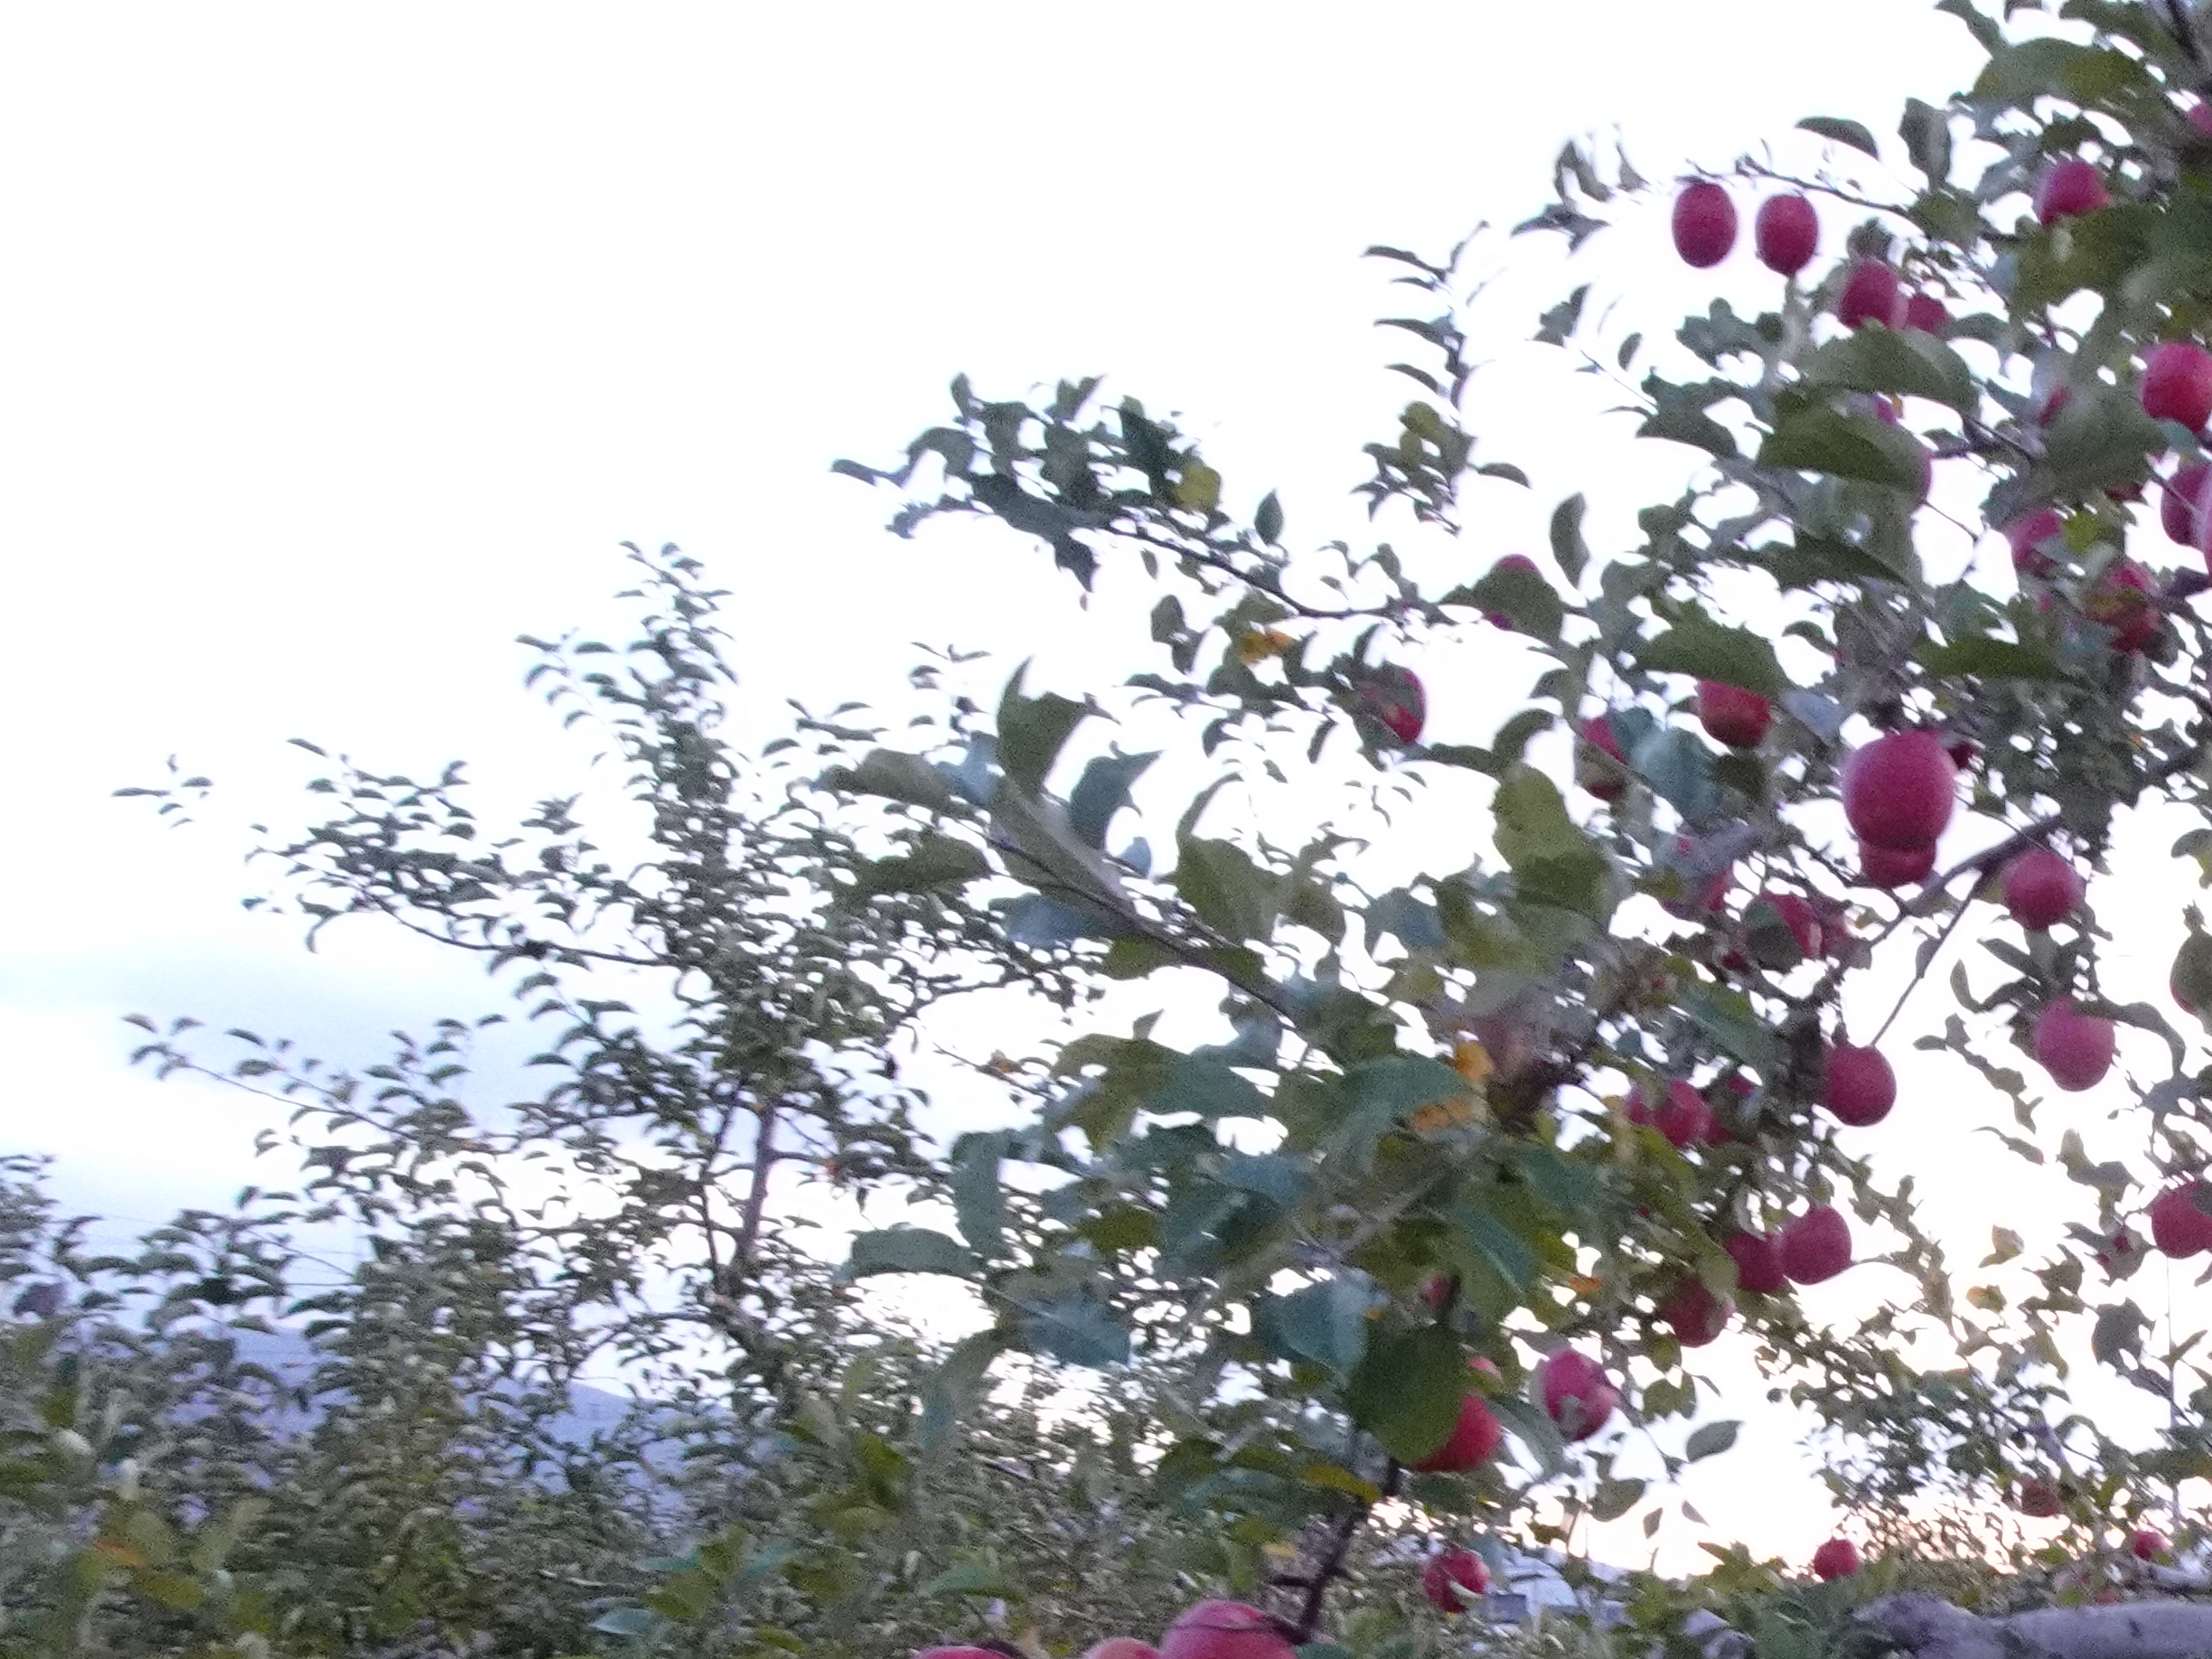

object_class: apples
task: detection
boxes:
[2011,509,2064,576]
[2152,1182,2212,1257]
[1416,1276,1452,1310]
[2097,1228,2134,1271]
[1407,1360,1503,1473]
[2097,562,2159,651]
[1706,936,1746,977]
[1702,1079,1752,1144]
[1157,1599,1299,1659]
[1724,1233,1782,1293]
[1922,728,1974,771]
[1656,835,1732,921]
[2005,851,2084,930]
[1672,183,1737,268]
[1877,395,1895,425]
[1378,672,1425,743]
[2132,1531,2170,1562]
[1755,194,1818,275]
[1637,1207,1648,1216]
[1486,554,1541,629]
[1580,716,1626,800]
[1660,1277,1730,1346]
[1914,440,1931,513]
[1759,898,1814,957]
[2021,1477,2061,1517]
[1625,1081,1700,1149]
[1806,898,1845,952]
[1813,1538,1860,1581]
[1825,1045,1896,1126]
[1839,259,1898,329]
[2039,383,2070,426]
[1698,679,1770,747]
[1900,295,1950,336]
[2187,102,2212,136]
[1423,1549,1490,1613]
[2161,465,2212,545]
[1859,836,1936,888]
[2170,982,2196,1015]
[1076,1637,1162,1659]
[1779,1208,1851,1285]
[2143,342,2212,433]
[1542,1349,1612,1441]
[1843,733,1955,850]
[2034,998,2115,1091]
[2038,161,2110,225]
